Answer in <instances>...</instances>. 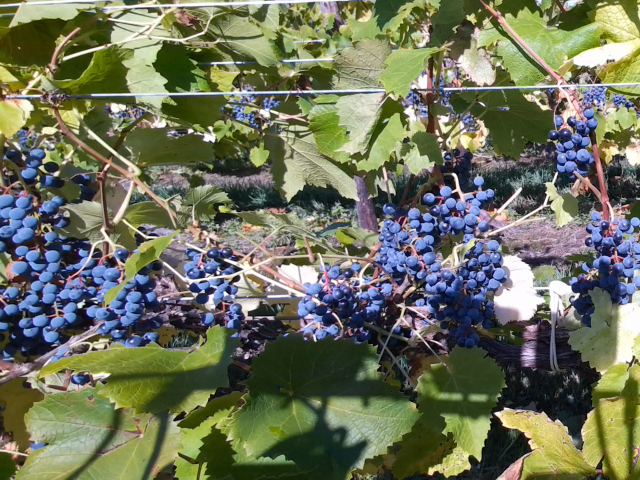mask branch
Returning a JSON list of instances; mask_svg holds the SVG:
<instances>
[{
	"label": "branch",
	"instance_id": "3",
	"mask_svg": "<svg viewBox=\"0 0 640 480\" xmlns=\"http://www.w3.org/2000/svg\"><path fill=\"white\" fill-rule=\"evenodd\" d=\"M589 143L593 152L595 163L597 164L598 186L599 192L602 196L601 215L605 221H608L610 219V215L608 212L609 193L606 190L604 162L602 161L600 150L597 145L596 130L594 128H591L589 130Z\"/></svg>",
	"mask_w": 640,
	"mask_h": 480
},
{
	"label": "branch",
	"instance_id": "4",
	"mask_svg": "<svg viewBox=\"0 0 640 480\" xmlns=\"http://www.w3.org/2000/svg\"><path fill=\"white\" fill-rule=\"evenodd\" d=\"M260 270L265 272L271 276L277 277L283 284L290 286L292 289H295L298 292L304 293L306 291V287L297 282H294L292 279L287 278L281 271L278 269H273L265 264L260 266Z\"/></svg>",
	"mask_w": 640,
	"mask_h": 480
},
{
	"label": "branch",
	"instance_id": "2",
	"mask_svg": "<svg viewBox=\"0 0 640 480\" xmlns=\"http://www.w3.org/2000/svg\"><path fill=\"white\" fill-rule=\"evenodd\" d=\"M483 8L494 17L499 23H501L504 29L525 49V51L529 54V56L536 61L542 68L548 72L551 76H553L560 83H568L569 80L561 75L557 70L551 67L545 59L540 57L530 46V44L519 34L516 30L510 25V23L494 8L487 2L484 1L482 3Z\"/></svg>",
	"mask_w": 640,
	"mask_h": 480
},
{
	"label": "branch",
	"instance_id": "5",
	"mask_svg": "<svg viewBox=\"0 0 640 480\" xmlns=\"http://www.w3.org/2000/svg\"><path fill=\"white\" fill-rule=\"evenodd\" d=\"M149 117V113L144 111L140 116L136 117L133 121H131L125 129H123L116 137L113 142L112 149L117 151L122 143L123 139L140 123H142L145 119Z\"/></svg>",
	"mask_w": 640,
	"mask_h": 480
},
{
	"label": "branch",
	"instance_id": "9",
	"mask_svg": "<svg viewBox=\"0 0 640 480\" xmlns=\"http://www.w3.org/2000/svg\"><path fill=\"white\" fill-rule=\"evenodd\" d=\"M433 171H434L435 181H436L437 185L439 187H443L445 185V182L442 179L440 166L438 164H435L433 166Z\"/></svg>",
	"mask_w": 640,
	"mask_h": 480
},
{
	"label": "branch",
	"instance_id": "7",
	"mask_svg": "<svg viewBox=\"0 0 640 480\" xmlns=\"http://www.w3.org/2000/svg\"><path fill=\"white\" fill-rule=\"evenodd\" d=\"M427 92H428L427 131L430 135H433L435 133V129L437 128V125L435 124V120H434V114H433V104H432L433 92L430 90H427Z\"/></svg>",
	"mask_w": 640,
	"mask_h": 480
},
{
	"label": "branch",
	"instance_id": "1",
	"mask_svg": "<svg viewBox=\"0 0 640 480\" xmlns=\"http://www.w3.org/2000/svg\"><path fill=\"white\" fill-rule=\"evenodd\" d=\"M52 113L57 121V124L59 125V128L61 130V132L63 133V135L71 140L74 141L76 144H78L82 149L86 150L89 154H91L92 156L96 157L97 159H99L100 161L105 162L100 169L99 175H98V188H99V195H100V217H101V224L102 227L105 230V232L110 236V231H109V222H108V214H107V193H106V185H105V176L107 174L108 169L110 168V166L114 167L118 172H120L121 174H123L129 181H131L133 184H135V186L137 188H139V190L142 193H145L147 195H150L151 198L158 203L164 210L168 211L173 217L177 216V212L171 208L170 206L166 205L162 200L166 201L167 200L165 198L160 197L157 192L155 190H153L152 188H149L147 186H145L141 180L137 177H135L128 169H126L124 166H122L119 162H117L116 160H114V155L112 153H109L108 155L102 154L101 152H99L98 150H96L95 148H93L92 146H90L88 143H86L85 141H83V139L79 136H77L74 133H71L67 126L66 123L60 113V111L57 108H54L52 110Z\"/></svg>",
	"mask_w": 640,
	"mask_h": 480
},
{
	"label": "branch",
	"instance_id": "6",
	"mask_svg": "<svg viewBox=\"0 0 640 480\" xmlns=\"http://www.w3.org/2000/svg\"><path fill=\"white\" fill-rule=\"evenodd\" d=\"M188 230L192 232L196 237L208 243L209 245H213L219 248L220 250H223L225 248V245L221 241H219L216 238H211L209 235H206L204 232L200 231L194 225H190L188 227Z\"/></svg>",
	"mask_w": 640,
	"mask_h": 480
},
{
	"label": "branch",
	"instance_id": "8",
	"mask_svg": "<svg viewBox=\"0 0 640 480\" xmlns=\"http://www.w3.org/2000/svg\"><path fill=\"white\" fill-rule=\"evenodd\" d=\"M566 91L572 96L576 111L581 113L583 111V106L578 92L575 89H566Z\"/></svg>",
	"mask_w": 640,
	"mask_h": 480
}]
</instances>
